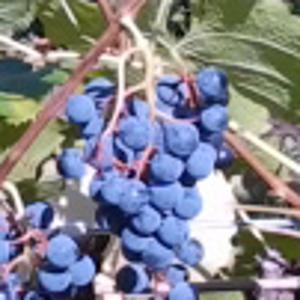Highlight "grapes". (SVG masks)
<instances>
[{"label": "grapes", "instance_id": "1", "mask_svg": "<svg viewBox=\"0 0 300 300\" xmlns=\"http://www.w3.org/2000/svg\"><path fill=\"white\" fill-rule=\"evenodd\" d=\"M200 96L190 107L186 87L175 75L155 82L149 107L144 100L112 96L116 85L95 79L81 96L66 102L67 120L80 125L83 149L66 147L57 155L63 180L82 179L87 165L97 172L89 197L97 203L95 223L122 233L126 264L114 275L115 290L143 295L158 271L168 300H199L188 266L204 260V244L191 237V221L203 209L198 181L211 170L228 169L233 154L223 132L230 123L231 82L219 68L194 75Z\"/></svg>", "mask_w": 300, "mask_h": 300}, {"label": "grapes", "instance_id": "2", "mask_svg": "<svg viewBox=\"0 0 300 300\" xmlns=\"http://www.w3.org/2000/svg\"><path fill=\"white\" fill-rule=\"evenodd\" d=\"M54 222L43 201L17 206L9 221L0 214V300H51L96 278L94 257L69 229L54 231Z\"/></svg>", "mask_w": 300, "mask_h": 300}]
</instances>
